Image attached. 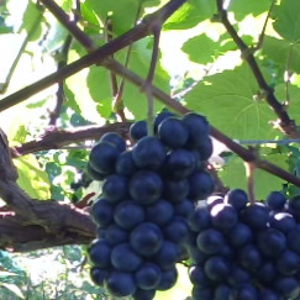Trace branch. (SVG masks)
Masks as SVG:
<instances>
[{
	"instance_id": "obj_1",
	"label": "branch",
	"mask_w": 300,
	"mask_h": 300,
	"mask_svg": "<svg viewBox=\"0 0 300 300\" xmlns=\"http://www.w3.org/2000/svg\"><path fill=\"white\" fill-rule=\"evenodd\" d=\"M185 3L186 0H171L153 14H146L140 21V24L114 38H112V21L107 19L105 21V43L102 47L98 48L96 43L90 37H87V35L76 25L81 14L80 0L74 1V11L71 18L54 0H43V6L48 8L59 22L70 32L67 35L65 42H63L57 50L51 52V56L58 62V70L22 90L0 99V110H6L13 104L25 100L44 89L50 88L57 82V101L50 120L47 122V126L50 129H53L57 124V119L61 114V108L64 104V78L96 63L98 66H105L108 69L117 110L121 116V120L124 123H127L129 117L122 102L116 74L127 79L136 87L140 88L141 91L145 90V80L113 59V53L123 50L134 42L145 38L151 27L167 21L170 16ZM74 37L88 54L67 66L68 48L72 45Z\"/></svg>"
},
{
	"instance_id": "obj_2",
	"label": "branch",
	"mask_w": 300,
	"mask_h": 300,
	"mask_svg": "<svg viewBox=\"0 0 300 300\" xmlns=\"http://www.w3.org/2000/svg\"><path fill=\"white\" fill-rule=\"evenodd\" d=\"M217 14L214 17L216 22L223 24L225 30L228 35L231 37L232 41L235 43L237 48L239 49L241 55L243 56L245 62L248 64L253 77L255 78L257 85L261 88L266 98L268 99L270 105L275 111L276 115L281 120L280 127L285 131V133L293 138H297L299 133L296 131V122L291 120L287 115L285 108L283 107L280 101H277L270 88L266 85L263 80L262 75L259 72V69L255 63V59L253 58V53L249 49V47L242 42V40L238 37L231 23L228 21L227 13L224 10V1H217Z\"/></svg>"
},
{
	"instance_id": "obj_3",
	"label": "branch",
	"mask_w": 300,
	"mask_h": 300,
	"mask_svg": "<svg viewBox=\"0 0 300 300\" xmlns=\"http://www.w3.org/2000/svg\"><path fill=\"white\" fill-rule=\"evenodd\" d=\"M209 135L222 143L229 150H232L235 154H237L241 159L245 161H250L254 165H256L259 169H263L268 171L276 176H279L285 179L287 182L294 183L297 187H300V179L293 174L287 172L284 168L279 167L278 165L269 162L267 160H262L258 156V148L256 146H249L247 150L238 142L233 141L229 136L223 133L218 128H214L211 126V130Z\"/></svg>"
},
{
	"instance_id": "obj_4",
	"label": "branch",
	"mask_w": 300,
	"mask_h": 300,
	"mask_svg": "<svg viewBox=\"0 0 300 300\" xmlns=\"http://www.w3.org/2000/svg\"><path fill=\"white\" fill-rule=\"evenodd\" d=\"M152 95L169 108H172L174 111L181 112L183 114H187L189 112V109L186 106L159 90L156 85H152Z\"/></svg>"
}]
</instances>
